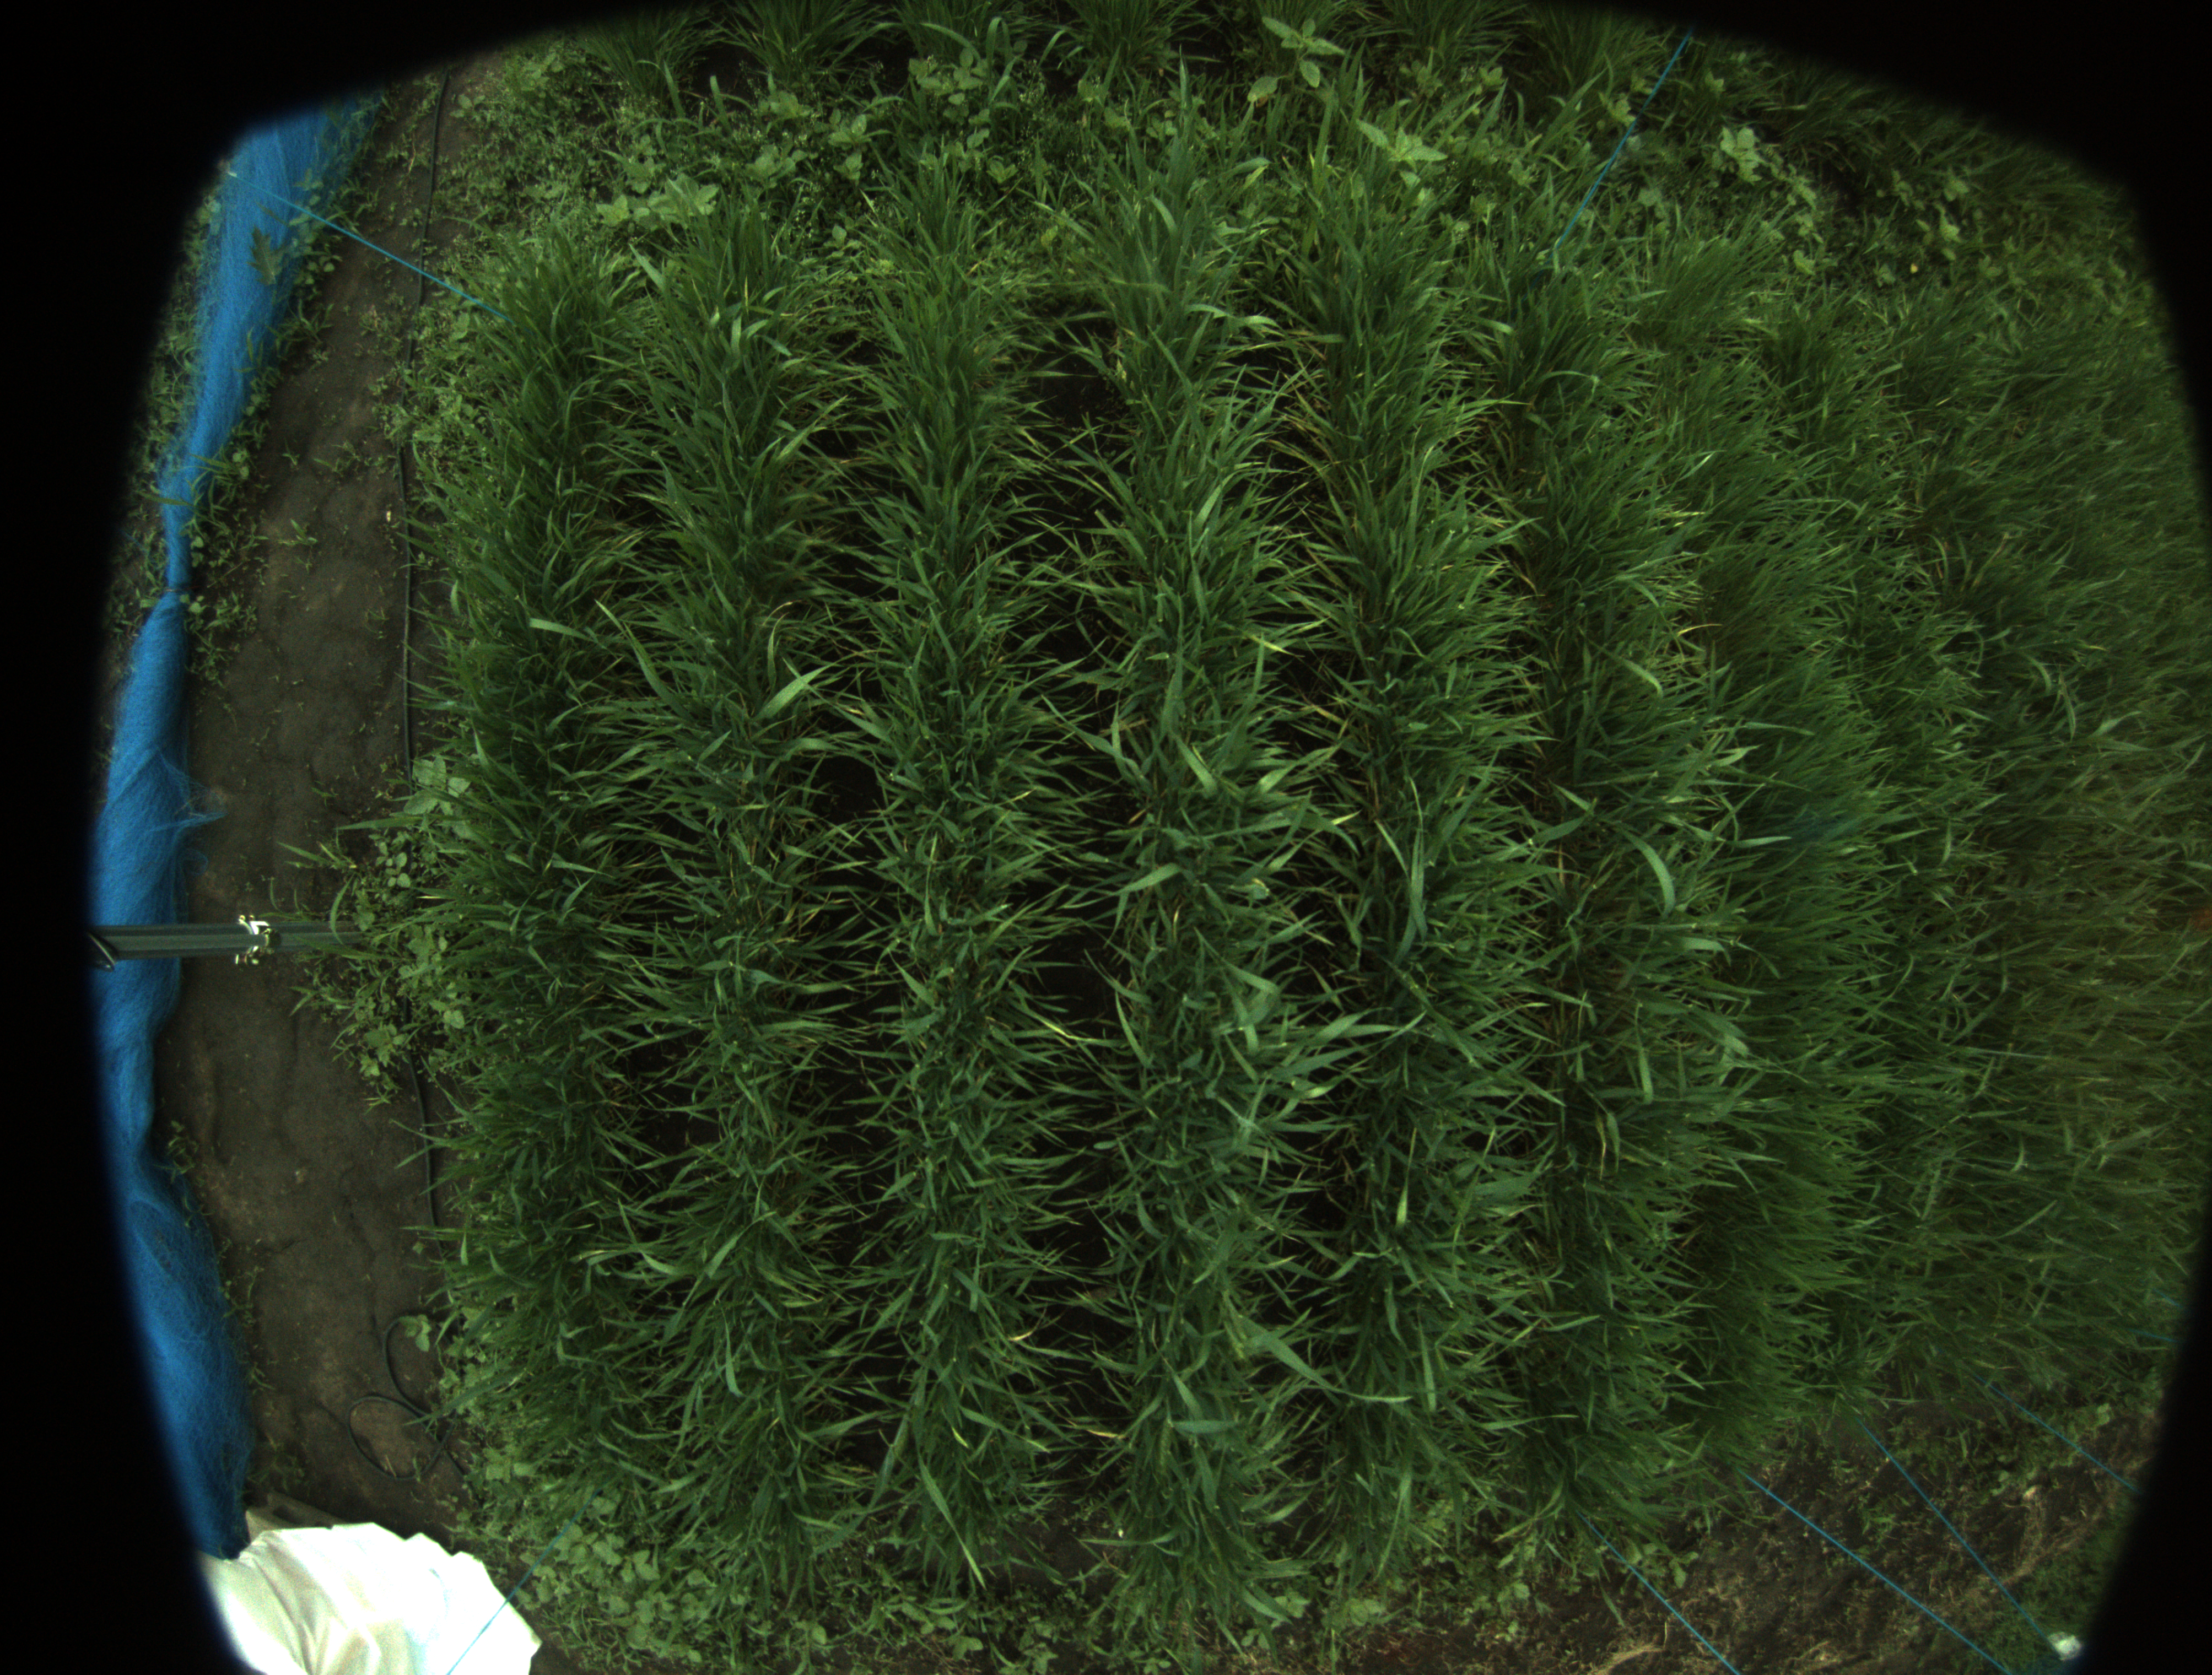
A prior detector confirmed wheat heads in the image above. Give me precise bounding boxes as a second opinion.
[1152,1424,1172,1473]
[657,493,688,521]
